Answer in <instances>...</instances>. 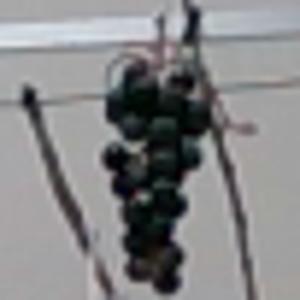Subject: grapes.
Masks as SVG:
<instances>
[{"mask_svg": "<svg viewBox=\"0 0 300 300\" xmlns=\"http://www.w3.org/2000/svg\"><path fill=\"white\" fill-rule=\"evenodd\" d=\"M201 71L192 62L173 68L161 85L159 75L143 58L124 69L117 88L104 97V117L117 126L128 143H144L131 152L113 141L100 153L103 169L110 173V191L122 200L120 222L127 226L119 238L128 260L124 278L146 283L162 297H171L184 285L181 266L186 252L174 240L176 222L192 209L181 190L188 173L201 169L206 155L200 138L213 124V106L204 97L193 98Z\"/></svg>", "mask_w": 300, "mask_h": 300, "instance_id": "1", "label": "grapes"}]
</instances>
